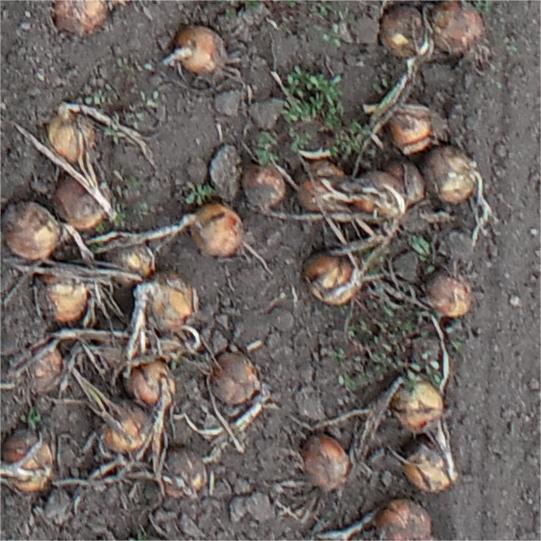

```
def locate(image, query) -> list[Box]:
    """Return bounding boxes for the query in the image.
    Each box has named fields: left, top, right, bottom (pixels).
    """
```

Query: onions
left=392, top=379, right=443, bottom=429
left=120, top=247, right=155, bottom=277
left=146, top=284, right=195, bottom=335
left=389, top=159, right=423, bottom=201
left=385, top=104, right=433, bottom=153
left=4, top=202, right=60, bottom=258
left=431, top=3, right=482, bottom=57
left=160, top=448, right=205, bottom=492
left=129, top=362, right=170, bottom=404
left=52, top=172, right=107, bottom=227
left=402, top=443, right=452, bottom=492
left=422, top=148, right=477, bottom=203
left=300, top=434, right=348, bottom=487
left=295, top=164, right=343, bottom=212
left=49, top=108, right=94, bottom=161
left=41, top=274, right=87, bottom=322
left=303, top=251, right=361, bottom=306
left=169, top=25, right=221, bottom=75
left=8, top=438, right=49, bottom=491
left=53, top=0, right=114, bottom=39
left=103, top=413, right=146, bottom=453
left=378, top=6, right=428, bottom=55
left=28, top=350, right=61, bottom=391
left=425, top=273, right=472, bottom=317
left=187, top=202, right=241, bottom=258
left=60, top=228, right=93, bottom=261
left=369, top=496, right=432, bottom=537
left=359, top=174, right=406, bottom=216
left=209, top=352, right=256, bottom=405
left=243, top=166, right=286, bottom=211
